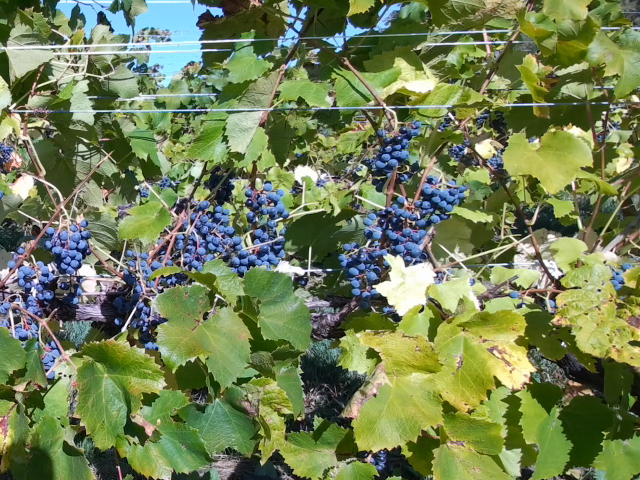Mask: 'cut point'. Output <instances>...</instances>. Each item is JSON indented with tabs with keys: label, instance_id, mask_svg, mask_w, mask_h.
Returning a JSON list of instances; mask_svg holds the SVG:
<instances>
[{
	"label": "cut point",
	"instance_id": "1",
	"mask_svg": "<svg viewBox=\"0 0 640 480\" xmlns=\"http://www.w3.org/2000/svg\"><path fill=\"white\" fill-rule=\"evenodd\" d=\"M386 109L388 110V112H390L391 114H393V115H394V117H395L394 121H395V122H397V121H398V114H397V112H396V111H394L393 109H388V108H387V105H386Z\"/></svg>",
	"mask_w": 640,
	"mask_h": 480
}]
</instances>
